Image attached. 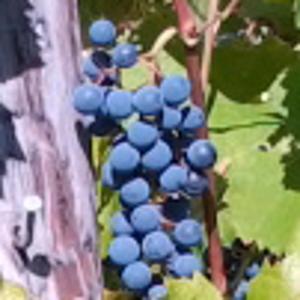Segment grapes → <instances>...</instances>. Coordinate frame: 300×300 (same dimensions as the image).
<instances>
[{
	"instance_id": "grapes-1",
	"label": "grapes",
	"mask_w": 300,
	"mask_h": 300,
	"mask_svg": "<svg viewBox=\"0 0 300 300\" xmlns=\"http://www.w3.org/2000/svg\"><path fill=\"white\" fill-rule=\"evenodd\" d=\"M88 40L94 48L83 62L88 80L73 89L71 103L79 115H95L93 136L112 137L101 173L104 188L119 193L120 208L109 220V261L120 269L121 286L157 300L166 277L190 282L209 272L208 260L192 253L204 227L192 218L190 200L210 195L200 170L214 169L220 150L212 139H196L205 114L185 105L188 78L167 75L134 44H122L112 20H92Z\"/></svg>"
}]
</instances>
